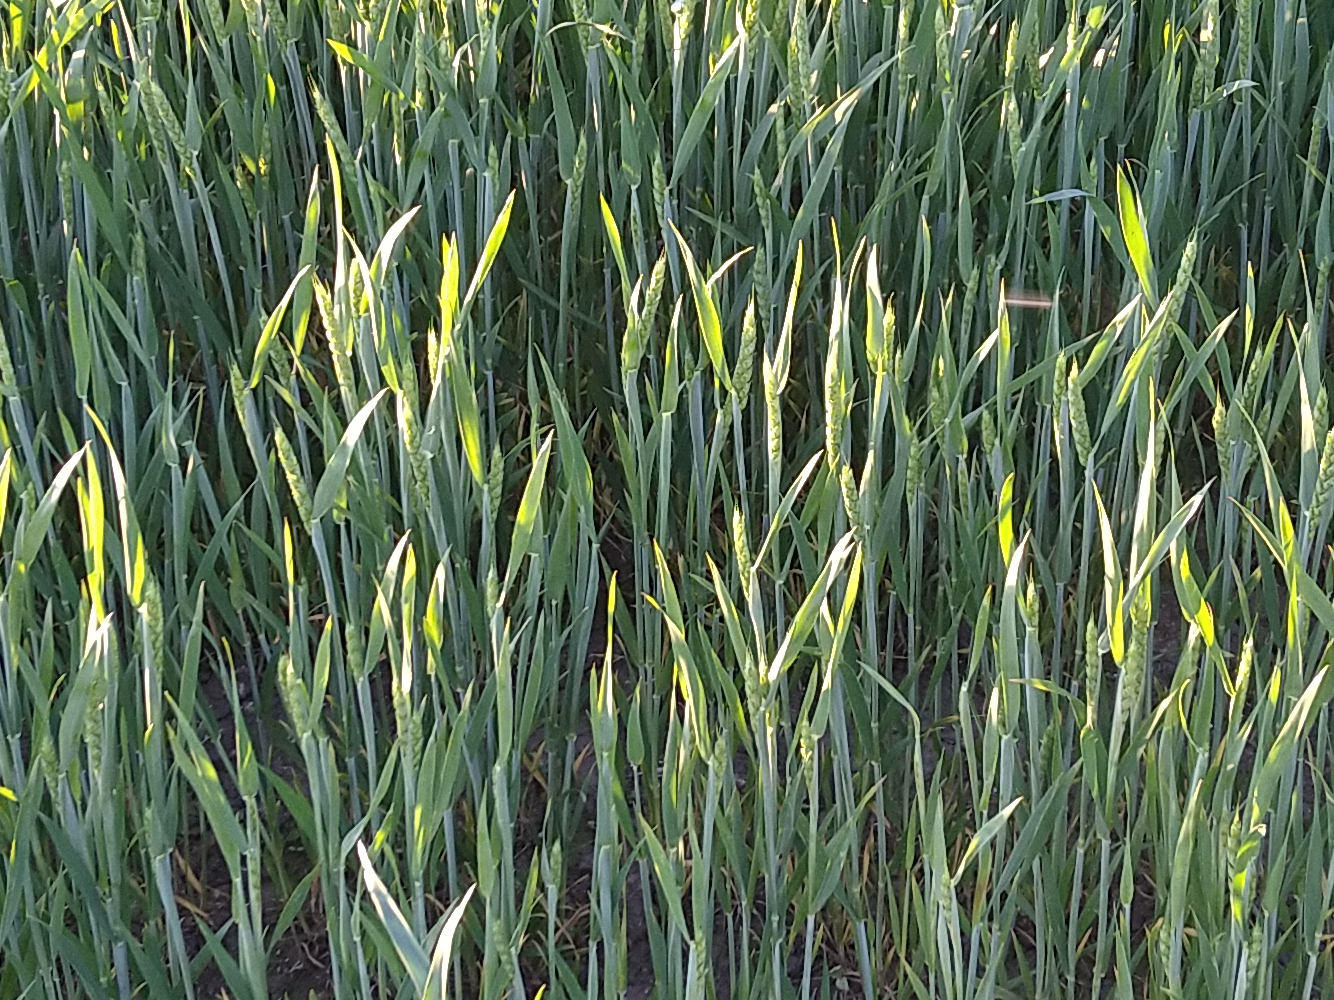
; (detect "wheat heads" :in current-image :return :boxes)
[96,77,116,120]
[712,731,728,790]
[322,0,347,45]
[1243,496,1252,539]
[827,360,843,468]
[1206,0,1219,81]
[1026,585,1040,626]
[568,133,587,209]
[1131,593,1149,698]
[1152,417,1167,471]
[59,159,73,224]
[988,254,996,299]
[567,0,592,50]
[684,348,696,381]
[749,245,773,326]
[735,309,756,407]
[1007,97,1021,166]
[197,0,226,41]
[260,0,288,44]
[314,91,355,183]
[660,0,673,52]
[1037,722,1052,780]
[982,410,995,452]
[488,141,498,192]
[316,284,353,389]
[1214,404,1231,477]
[1089,157,1097,190]
[1161,241,1196,356]
[1241,345,1265,426]
[930,389,946,443]
[130,230,146,283]
[490,918,517,979]
[272,426,316,534]
[385,262,393,297]
[636,4,647,67]
[286,665,308,740]
[694,926,710,982]
[840,466,868,547]
[1085,620,1102,707]
[409,712,424,771]
[344,622,367,675]
[231,366,247,413]
[941,874,950,918]
[897,0,907,90]
[797,718,818,786]
[349,258,362,307]
[39,736,61,788]
[1312,384,1329,436]
[1246,921,1260,980]
[1305,120,1322,175]
[958,457,972,517]
[630,206,639,246]
[1188,628,1201,677]
[787,42,801,121]
[1313,255,1328,323]
[909,433,919,498]
[1007,16,1020,87]
[829,0,845,37]
[684,0,697,39]
[551,835,562,891]
[1235,635,1253,690]
[734,507,757,597]
[392,91,402,160]
[144,570,165,688]
[153,81,196,165]
[237,168,258,215]
[1229,816,1241,862]
[489,440,504,520]
[759,651,772,703]
[768,0,792,63]
[1028,11,1045,88]
[797,0,812,91]
[408,476,421,515]
[402,359,416,405]
[1251,405,1272,456]
[1191,60,1206,111]
[390,679,410,758]
[260,120,273,180]
[0,2,12,92]
[83,681,108,772]
[402,404,435,508]
[962,266,977,332]
[1217,804,1229,860]
[428,330,437,378]
[1119,646,1136,726]
[1067,370,1092,464]
[652,155,668,218]
[715,395,732,443]
[0,304,14,396]
[934,9,948,71]
[748,168,771,228]
[369,0,381,26]
[274,652,293,704]
[638,259,665,341]
[747,0,762,59]
[232,0,260,30]
[259,314,290,382]
[1307,422,1334,536]
[487,562,501,613]
[768,369,781,458]
[1157,921,1171,978]
[776,102,787,158]
[415,27,426,110]
[883,307,894,353]
[745,651,764,735]
[476,0,491,50]
[1236,0,1250,74]
[136,75,166,162]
